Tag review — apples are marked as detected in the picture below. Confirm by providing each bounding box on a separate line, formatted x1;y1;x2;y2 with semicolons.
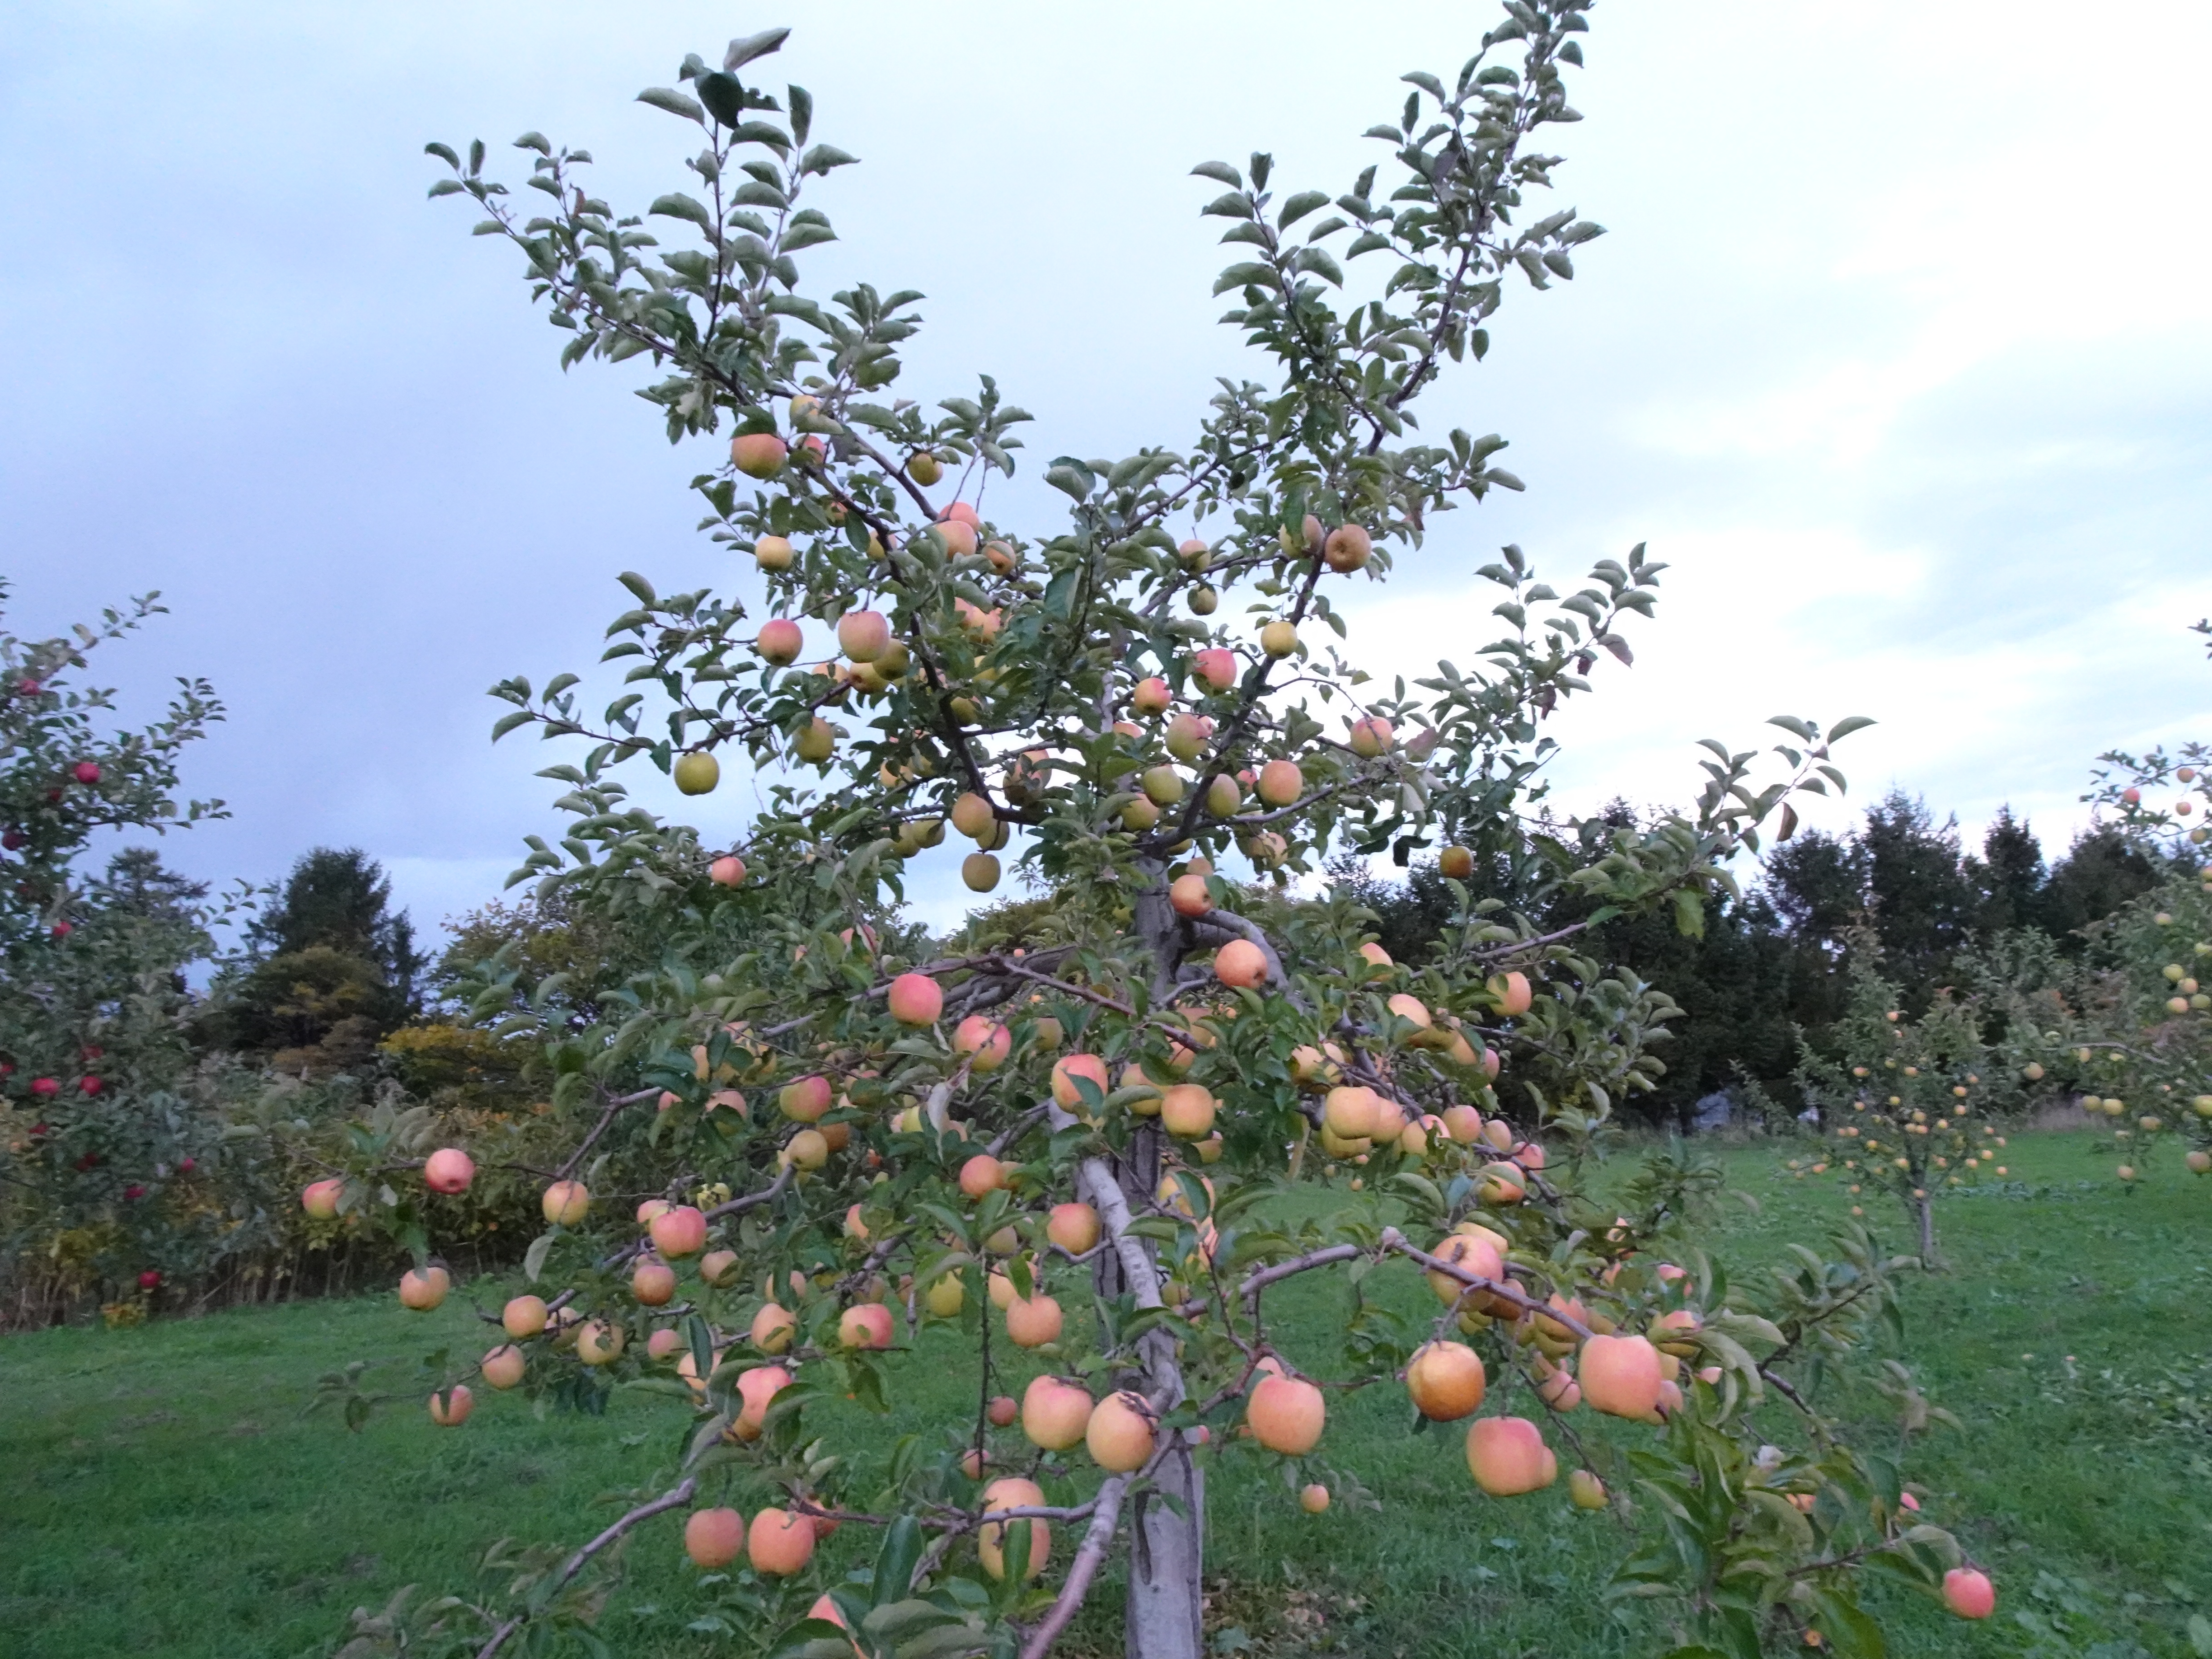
1001;1161;1023;1191
1355;1154;1370;1165
1259;760;1303;807
972;655;1007;683
807;1593;869;1659
751;1303;798;1355
577;1318;624;1365
636;1252;667;1268
981;540;1016;575
867;530;898;562
838;610;889;663
846;1203;869;1239
953;597;973;621
912;815;944;848
817;1121;850;1152
1899;1492;1920;1515
721;1415;763;1443
962;853;1001;892
1420;1007;1461;1053
1193;649;1237;691
977;1517;1051;1581
988;1261;1037;1311
1251;832;1288;869
1174;1008;1214;1046
1478;1161;1525;1207
777;1145;790;1159
711;857;746;888
696;1182;731;1212
1696;1366;1723;1385
658;1091;687;1125
1570;1469;1608;1510
1191;1130;1223;1164
706;1088;747;1137
1656;1311;1702;1359
302;1179;345;1220
1018;749;1051;787
1321;1042;1345;1084
919;667;946;693
1163;1036;1195;1073
1165;713;1208;761
1121;793;1159;832
893;675;909;692
677;1351;722;1406
1483;1048;1499;1081
844;1069;880;1105
817;1041;837;1063
994;608;1013;622
1186;857;1213;877
1511;1142;1544;1180
1112;721;1142;738
1032;1017;1063;1051
1172;1304;1199;1324
908;747;942;777
982;1478;1047;1513
837;1303;893;1348
1942;1568;1994;1618
1533;1292;1579;1336
1501;1310;1537;1347
1448;1033;1476;1064
779;1075;832;1123
648;1205;687;1257
1239;1425;1252;1438
1189;586;1218;615
765;1270;806;1304
1465;1416;1543;1497
927;1268;967;1317
988;1396;1017;1426
908;452;943;486
1466;1311;1493;1327
1542;1370;1581;1412
735;1366;793;1428
1003;765;1042;806
813;1261;845;1287
1350;716;1393;758
969;607;987;635
1161;825;1193;855
962;1448;991;1480
1481;1119;1512;1152
828;501;848;527
1440;846;1473;879
1193;714;1212;734
889;1112;905;1132
1578;1334;1662;1418
1170;874;1213;917
1606;1216;1636;1255
1621;1252;1635;1261
1161;1084;1215;1142
1121;1063;1172;1115
776;1157;811;1188
1486;971;1532;1017
701;1250;740;1288
1214;939;1267;990
637;1200;669;1223
1359;942;1393;982
1174;999;1191;1008
1652;1344;1680;1381
1207;773;1241;818
399;1266;449;1311
1452;1221;1508;1255
1456;1312;1488;1334
1785;1493;1816;1513
1643;1380;1683;1425
1530;1351;1567;1382
1486;1278;1525;1321
1261;621;1298;659
1407;1038;1424;1048
430;1384;473;1426
544;1307;584;1348
1427;1234;1503;1312
1291;1044;1323;1079
960;1155;1004;1202
820;1049;849;1070
1300;1484;1330;1513
1576;1307;1617;1357
1441;1105;1481;1144
1046;1202;1101;1256
690;1045;735;1085
952;792;993;838
893;821;920;858
852;1276;885;1305
1141;765;1182;808
542;1180;589;1227
684;1507;744;1568
1179;539;1211;574
1405;1341;1485;1422
1214;1098;1223;1108
1531;1328;1577;1360
1539;1446;1557;1486
880;759;913;789
1214;1004;1237;1019
755;536;793;572
1158;1172;1213;1218
976;818;1009;850
1369;1097;1406;1144
872;638;910;680
811;663;851;706
795;945;807;961
648;1329;683;1363
502;1295;548;1339
735;1041;776;1085
794;435;824;463
1208;1036;1216;1048
787;1129;828;1169
1402;1114;1450;1159
1247;1375;1325;1456
939;502;979;534
1484;1083;1492;1091
1657;1264;1692;1296
839;924;876;952
952;1015;1011;1070
933;520;976;563
1021;1375;1094;1451
888;973;943;1027
1387;994;1431;1038
950;1120;968;1142
912;729;931;739
721;1021;754;1043
950;696;980;727
838;1092;859;1108
789;1498;843;1539
1051;1053;1108;1114
1005;1294;1062;1348
1234;768;1257;792
482;1344;525;1390
792;716;834;764
633;1265;675;1306
424;1148;475;1194
896;1274;925;1307
1254;1356;1286;1377
983;610;1000;641
1325;524;1371;573
1279;514;1325;559
757;619;803;666
868;1148;882;1167
1196;1425;1210;1443
804;589;834;619
1372;1051;1391;1078
1086;1390;1158;1472
889;736;899;743
653;1206;707;1253
1602;1262;1622;1286
731;433;787;479
1547;1299;1588;1343
901;1104;924;1133
748;1507;815;1576
1185;1216;1219;1268
1134;677;1170;717
790;395;820;421
674;751;719;795
1321;1118;1371;1160
848;661;889;694
1325;1086;1380;1140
